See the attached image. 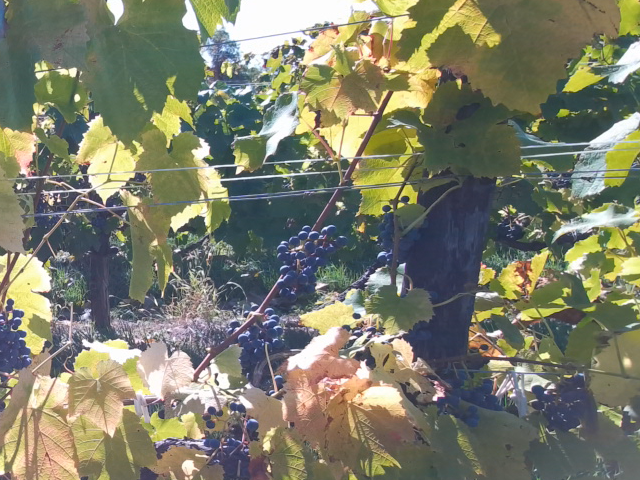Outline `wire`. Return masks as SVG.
Segmentation results:
<instances>
[{
    "mask_svg": "<svg viewBox=\"0 0 640 480\" xmlns=\"http://www.w3.org/2000/svg\"><path fill=\"white\" fill-rule=\"evenodd\" d=\"M456 372H474V373H487V374H512V375H524V376H561L564 374L563 370L559 371H526V370H514V369H489V368H477V367H457Z\"/></svg>",
    "mask_w": 640,
    "mask_h": 480,
    "instance_id": "wire-6",
    "label": "wire"
},
{
    "mask_svg": "<svg viewBox=\"0 0 640 480\" xmlns=\"http://www.w3.org/2000/svg\"><path fill=\"white\" fill-rule=\"evenodd\" d=\"M150 184H123V185H101L97 188H62L53 190H43V195H55L64 193H99L104 190H125V189H150Z\"/></svg>",
    "mask_w": 640,
    "mask_h": 480,
    "instance_id": "wire-5",
    "label": "wire"
},
{
    "mask_svg": "<svg viewBox=\"0 0 640 480\" xmlns=\"http://www.w3.org/2000/svg\"><path fill=\"white\" fill-rule=\"evenodd\" d=\"M640 151V146H632L625 148H616V149H577V150H568V151H557V152H545L538 154H524L520 156L521 160L526 159H540L547 157H559V156H570V155H579V154H618V153H627Z\"/></svg>",
    "mask_w": 640,
    "mask_h": 480,
    "instance_id": "wire-3",
    "label": "wire"
},
{
    "mask_svg": "<svg viewBox=\"0 0 640 480\" xmlns=\"http://www.w3.org/2000/svg\"><path fill=\"white\" fill-rule=\"evenodd\" d=\"M423 151L417 152H400V153H389V154H379V155H342V160H381V159H391V158H402V157H419L423 156Z\"/></svg>",
    "mask_w": 640,
    "mask_h": 480,
    "instance_id": "wire-7",
    "label": "wire"
},
{
    "mask_svg": "<svg viewBox=\"0 0 640 480\" xmlns=\"http://www.w3.org/2000/svg\"><path fill=\"white\" fill-rule=\"evenodd\" d=\"M236 168L235 164L227 163L226 165H184L173 166L166 168H137L134 170L125 171H84V172H66L49 175H19L9 176V181H21V180H52L68 177H86V176H127L136 175L139 173H168L175 171H187V170H233Z\"/></svg>",
    "mask_w": 640,
    "mask_h": 480,
    "instance_id": "wire-1",
    "label": "wire"
},
{
    "mask_svg": "<svg viewBox=\"0 0 640 480\" xmlns=\"http://www.w3.org/2000/svg\"><path fill=\"white\" fill-rule=\"evenodd\" d=\"M337 169H321L314 171H307L295 174H268V175H244L236 177H222V182H239L246 180H270V179H297L303 177L317 176L323 174H337Z\"/></svg>",
    "mask_w": 640,
    "mask_h": 480,
    "instance_id": "wire-4",
    "label": "wire"
},
{
    "mask_svg": "<svg viewBox=\"0 0 640 480\" xmlns=\"http://www.w3.org/2000/svg\"><path fill=\"white\" fill-rule=\"evenodd\" d=\"M611 144H624V145L640 144V139H630V140L608 139V140L585 141V142H576V143L556 142V143H544V144H522L519 146V149L520 150L546 149V148H558V147L578 148V147L611 145Z\"/></svg>",
    "mask_w": 640,
    "mask_h": 480,
    "instance_id": "wire-2",
    "label": "wire"
},
{
    "mask_svg": "<svg viewBox=\"0 0 640 480\" xmlns=\"http://www.w3.org/2000/svg\"><path fill=\"white\" fill-rule=\"evenodd\" d=\"M332 157L326 158H305L300 160H286V161H277V160H265V165H274V166H288V165H303L307 163H329L332 162Z\"/></svg>",
    "mask_w": 640,
    "mask_h": 480,
    "instance_id": "wire-8",
    "label": "wire"
}]
</instances>
